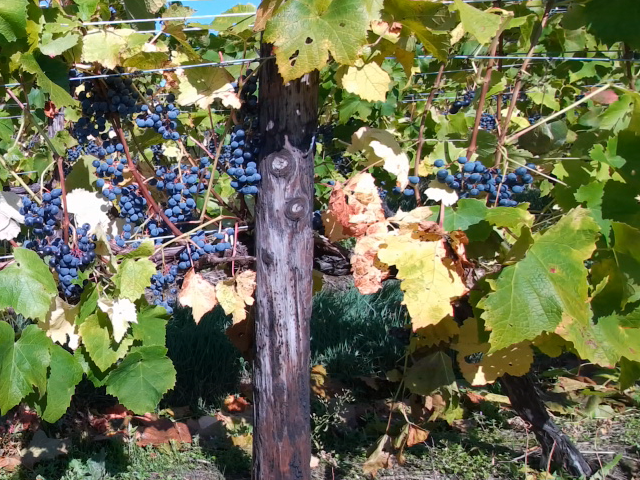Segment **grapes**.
Here are the masks:
<instances>
[{"label": "grapes", "mask_w": 640, "mask_h": 480, "mask_svg": "<svg viewBox=\"0 0 640 480\" xmlns=\"http://www.w3.org/2000/svg\"><path fill=\"white\" fill-rule=\"evenodd\" d=\"M154 304L156 306H161L164 307V309L169 313L172 314L174 312V308L172 307L174 305V301L172 299H156L154 301Z\"/></svg>", "instance_id": "012428b0"}, {"label": "grapes", "mask_w": 640, "mask_h": 480, "mask_svg": "<svg viewBox=\"0 0 640 480\" xmlns=\"http://www.w3.org/2000/svg\"><path fill=\"white\" fill-rule=\"evenodd\" d=\"M257 82H258L257 76L253 75L252 78L244 84V87L242 88V91L240 93V97L242 99L246 98V102L248 105H255L257 102V96L252 95L256 92Z\"/></svg>", "instance_id": "54f908b8"}, {"label": "grapes", "mask_w": 640, "mask_h": 480, "mask_svg": "<svg viewBox=\"0 0 640 480\" xmlns=\"http://www.w3.org/2000/svg\"><path fill=\"white\" fill-rule=\"evenodd\" d=\"M62 195L61 188H52L48 193L42 194V200L45 205L39 204L29 198L22 196L21 202L24 206L19 208V214L24 215V225L26 228H32L33 236H52L53 229L57 218L54 215L59 213Z\"/></svg>", "instance_id": "f8a65327"}, {"label": "grapes", "mask_w": 640, "mask_h": 480, "mask_svg": "<svg viewBox=\"0 0 640 480\" xmlns=\"http://www.w3.org/2000/svg\"><path fill=\"white\" fill-rule=\"evenodd\" d=\"M125 164H127V160L125 158H121L120 162L116 166L113 165V160L111 158H107L104 163L99 160H93L92 166L96 168V174L98 175V179L95 182V186L97 188H102L105 185L104 177H110L111 174L114 178L110 179V182L113 186H117L118 183L124 182V177L122 176V172L125 170Z\"/></svg>", "instance_id": "1ff8f66d"}, {"label": "grapes", "mask_w": 640, "mask_h": 480, "mask_svg": "<svg viewBox=\"0 0 640 480\" xmlns=\"http://www.w3.org/2000/svg\"><path fill=\"white\" fill-rule=\"evenodd\" d=\"M115 151L123 153L121 143L111 144L110 141H104L103 146L100 147L98 155L100 158L107 156L108 154H114Z\"/></svg>", "instance_id": "802abce8"}, {"label": "grapes", "mask_w": 640, "mask_h": 480, "mask_svg": "<svg viewBox=\"0 0 640 480\" xmlns=\"http://www.w3.org/2000/svg\"><path fill=\"white\" fill-rule=\"evenodd\" d=\"M138 186L136 184L106 188L102 191L103 197H108L109 201H113L119 195V205L121 212L118 215L120 220L125 219V224L122 226L124 231L123 235L117 234L115 236V243L122 247L125 245V241L131 237L132 226L129 223H136L140 218L147 220L149 215L143 210L147 206V200L145 197H141L136 191Z\"/></svg>", "instance_id": "e5b3c951"}, {"label": "grapes", "mask_w": 640, "mask_h": 480, "mask_svg": "<svg viewBox=\"0 0 640 480\" xmlns=\"http://www.w3.org/2000/svg\"><path fill=\"white\" fill-rule=\"evenodd\" d=\"M199 162V166H192L190 172H184L181 175L182 181L178 183L174 182L177 177V170L172 168L168 173L165 167L155 171V175L163 177V180L150 179L148 181L150 186H156L158 192L167 189L166 194L171 196L167 199L169 208L164 211V215L170 222L188 221L191 218L190 209L196 207L192 194L197 192L202 194L205 189L203 182H197L199 173H203L206 181L211 178V171L206 170V167L210 165V160L206 156H201Z\"/></svg>", "instance_id": "b958b902"}, {"label": "grapes", "mask_w": 640, "mask_h": 480, "mask_svg": "<svg viewBox=\"0 0 640 480\" xmlns=\"http://www.w3.org/2000/svg\"><path fill=\"white\" fill-rule=\"evenodd\" d=\"M206 234L202 229L197 230V235L190 236V240L194 243L189 246V250L185 249L179 254V259L182 261L178 265L171 264L169 266V272L164 274L161 270H157L150 275V278L154 281L150 285V289L155 296L162 293L166 283L173 284L175 282V276H177L180 270L188 269L191 266V261H198L202 256L207 254L223 253L226 249H230L232 244L230 242H218L217 244H210L206 242Z\"/></svg>", "instance_id": "5460f4e3"}, {"label": "grapes", "mask_w": 640, "mask_h": 480, "mask_svg": "<svg viewBox=\"0 0 640 480\" xmlns=\"http://www.w3.org/2000/svg\"><path fill=\"white\" fill-rule=\"evenodd\" d=\"M84 90L85 91L79 93V100L83 107L82 114L85 117H80L78 122L73 126V134L78 144H84L87 136L92 135L93 137H98L100 132H104L106 129V118L101 116L103 115V111H108V108L101 91L92 85L91 82L84 84ZM96 110L98 113L95 114V119L98 129H95L93 123H89V119L94 116ZM100 137L102 140L108 139L106 133H101Z\"/></svg>", "instance_id": "83cd7487"}, {"label": "grapes", "mask_w": 640, "mask_h": 480, "mask_svg": "<svg viewBox=\"0 0 640 480\" xmlns=\"http://www.w3.org/2000/svg\"><path fill=\"white\" fill-rule=\"evenodd\" d=\"M146 233L149 236L157 235V234H170L171 229L167 227L165 224L160 226L155 218H152L146 224Z\"/></svg>", "instance_id": "91a60905"}, {"label": "grapes", "mask_w": 640, "mask_h": 480, "mask_svg": "<svg viewBox=\"0 0 640 480\" xmlns=\"http://www.w3.org/2000/svg\"><path fill=\"white\" fill-rule=\"evenodd\" d=\"M175 100L176 96L174 94H168L165 97V101L168 103L165 108L162 104H158L155 107L156 113H153L152 115H146L145 117L139 115L135 119L136 125L141 128L153 127V130L156 133L162 134V137L164 139H172L173 141H176L180 138V133L178 131H170V129L166 125V122L164 120H161L160 115L165 111L170 119H175L180 114V110L173 105L175 103Z\"/></svg>", "instance_id": "ef6de9ee"}, {"label": "grapes", "mask_w": 640, "mask_h": 480, "mask_svg": "<svg viewBox=\"0 0 640 480\" xmlns=\"http://www.w3.org/2000/svg\"><path fill=\"white\" fill-rule=\"evenodd\" d=\"M106 82L111 88L108 90L113 108L115 112L122 115H128L130 112H145L148 109L146 104L134 106L135 100L139 97V93L132 90V80L130 78L116 79L107 78Z\"/></svg>", "instance_id": "2adb6a1f"}, {"label": "grapes", "mask_w": 640, "mask_h": 480, "mask_svg": "<svg viewBox=\"0 0 640 480\" xmlns=\"http://www.w3.org/2000/svg\"><path fill=\"white\" fill-rule=\"evenodd\" d=\"M475 98V92L474 91H468L465 95H464V99L462 101H455L454 104L452 105V107L449 109V113L451 115H456L459 110L466 109L468 107V104Z\"/></svg>", "instance_id": "dcf779d0"}, {"label": "grapes", "mask_w": 640, "mask_h": 480, "mask_svg": "<svg viewBox=\"0 0 640 480\" xmlns=\"http://www.w3.org/2000/svg\"><path fill=\"white\" fill-rule=\"evenodd\" d=\"M90 230L89 223H82L76 229V234L81 235L76 243V248L82 252L79 257L70 254L71 248L63 242V238H57L52 244H49L47 238H41L40 245L37 240H25L23 243L24 248H35L38 251H43L45 255H51L49 265L55 268L66 297H72L76 291V285L71 284V280L79 278L77 268L88 265L95 259L94 250L97 249V245L89 240L87 233Z\"/></svg>", "instance_id": "0513c4c2"}, {"label": "grapes", "mask_w": 640, "mask_h": 480, "mask_svg": "<svg viewBox=\"0 0 640 480\" xmlns=\"http://www.w3.org/2000/svg\"><path fill=\"white\" fill-rule=\"evenodd\" d=\"M225 234H226V235H229V236H233V235L235 234V230H234L233 228L226 227V228L224 229V233H223V232H220V233H212V236H213L216 240H222V239L225 237Z\"/></svg>", "instance_id": "9fbda902"}, {"label": "grapes", "mask_w": 640, "mask_h": 480, "mask_svg": "<svg viewBox=\"0 0 640 480\" xmlns=\"http://www.w3.org/2000/svg\"><path fill=\"white\" fill-rule=\"evenodd\" d=\"M457 163L461 165L462 170L450 174L447 169H439L436 172V180L439 183H446L454 190H459L464 180L465 191L458 194L460 199H466L471 195L478 196L483 191L490 194L487 201L494 203L499 192L500 207H516L518 202L513 199L512 193L523 192L525 190L523 183L530 184L534 181L526 167H518L514 172H508L503 176L500 168L494 171L489 170L481 160L469 161L467 156H459Z\"/></svg>", "instance_id": "01657485"}, {"label": "grapes", "mask_w": 640, "mask_h": 480, "mask_svg": "<svg viewBox=\"0 0 640 480\" xmlns=\"http://www.w3.org/2000/svg\"><path fill=\"white\" fill-rule=\"evenodd\" d=\"M244 138V128L236 125L233 128L231 142L229 143V147L233 150L234 156L229 159V163L231 165L235 163L238 165L244 164V167L242 169L237 166L230 167L226 170V173L236 177V180L230 182L233 190H236L243 196L254 197L259 190L257 184L261 179V174L256 170L258 168L256 159L260 154V148L258 146L251 147L248 142L243 140Z\"/></svg>", "instance_id": "84f90ec7"}]
</instances>
